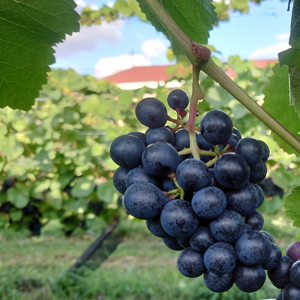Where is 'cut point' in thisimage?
<instances>
[{
	"instance_id": "6a23745f",
	"label": "cut point",
	"mask_w": 300,
	"mask_h": 300,
	"mask_svg": "<svg viewBox=\"0 0 300 300\" xmlns=\"http://www.w3.org/2000/svg\"><path fill=\"white\" fill-rule=\"evenodd\" d=\"M200 71L201 70L197 66L192 65V96H191V103H190L188 129H191L194 132H195L196 106L198 101H201L205 98L204 93L202 92L199 85Z\"/></svg>"
}]
</instances>
